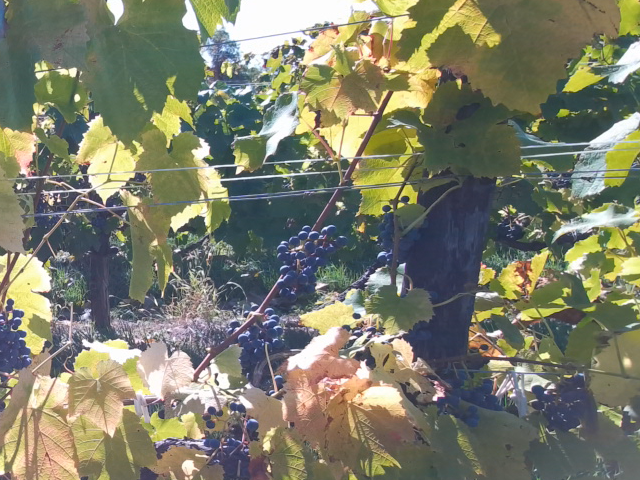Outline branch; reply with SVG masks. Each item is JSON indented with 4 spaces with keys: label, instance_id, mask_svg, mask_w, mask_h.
<instances>
[{
    "label": "branch",
    "instance_id": "ca6c30ca",
    "mask_svg": "<svg viewBox=\"0 0 640 480\" xmlns=\"http://www.w3.org/2000/svg\"><path fill=\"white\" fill-rule=\"evenodd\" d=\"M405 187H406V184L401 183L398 190L396 191L395 197L391 200V208L393 210H397L399 208L398 202Z\"/></svg>",
    "mask_w": 640,
    "mask_h": 480
},
{
    "label": "branch",
    "instance_id": "1ff4a987",
    "mask_svg": "<svg viewBox=\"0 0 640 480\" xmlns=\"http://www.w3.org/2000/svg\"><path fill=\"white\" fill-rule=\"evenodd\" d=\"M19 257H20V252L16 251L15 255H14V258H13V261H12L9 269L7 270V273L5 274L4 278L1 280L0 293L3 292L4 286L6 285L7 281L10 278V276L12 275V272L14 271V269H15L17 263H18Z\"/></svg>",
    "mask_w": 640,
    "mask_h": 480
},
{
    "label": "branch",
    "instance_id": "2b1400db",
    "mask_svg": "<svg viewBox=\"0 0 640 480\" xmlns=\"http://www.w3.org/2000/svg\"><path fill=\"white\" fill-rule=\"evenodd\" d=\"M414 169H415V165H414V164H411V165L409 166V168L407 169V171H406L405 175H404V180H405V181H408V180H409V177H410V175H411V173L413 172V170H414Z\"/></svg>",
    "mask_w": 640,
    "mask_h": 480
},
{
    "label": "branch",
    "instance_id": "ea751061",
    "mask_svg": "<svg viewBox=\"0 0 640 480\" xmlns=\"http://www.w3.org/2000/svg\"><path fill=\"white\" fill-rule=\"evenodd\" d=\"M358 164H359V160H352V162L349 164L346 172L339 180V185L341 187H344L346 185L347 181L352 176L354 169L358 166Z\"/></svg>",
    "mask_w": 640,
    "mask_h": 480
},
{
    "label": "branch",
    "instance_id": "170604dd",
    "mask_svg": "<svg viewBox=\"0 0 640 480\" xmlns=\"http://www.w3.org/2000/svg\"><path fill=\"white\" fill-rule=\"evenodd\" d=\"M395 95V92L393 90H390L384 97L383 99L380 101V108L377 111L374 119L372 120L369 129L367 130L365 136L362 138L361 142L359 143L357 150H356V154L357 155H362L366 146L368 145V142L371 140L373 134L375 133L380 121L382 120L384 113L387 110L388 107V103L389 101L393 98V96Z\"/></svg>",
    "mask_w": 640,
    "mask_h": 480
},
{
    "label": "branch",
    "instance_id": "1af6ec82",
    "mask_svg": "<svg viewBox=\"0 0 640 480\" xmlns=\"http://www.w3.org/2000/svg\"><path fill=\"white\" fill-rule=\"evenodd\" d=\"M53 158H54V154H53V153H50V154L48 155V158H47L46 163H45V165H44V169H43V174H44V175H47V174H48V172H49V168H50V165H51V162H52Z\"/></svg>",
    "mask_w": 640,
    "mask_h": 480
},
{
    "label": "branch",
    "instance_id": "982ccf7c",
    "mask_svg": "<svg viewBox=\"0 0 640 480\" xmlns=\"http://www.w3.org/2000/svg\"><path fill=\"white\" fill-rule=\"evenodd\" d=\"M341 194H342V191L340 189H336L334 191L333 195L330 197L328 203L325 205L324 209L320 213V216L317 218V220L313 225V228L315 230H319L321 228L323 222L326 220L328 214L332 210L333 206L335 205V203L337 202Z\"/></svg>",
    "mask_w": 640,
    "mask_h": 480
},
{
    "label": "branch",
    "instance_id": "325d2c04",
    "mask_svg": "<svg viewBox=\"0 0 640 480\" xmlns=\"http://www.w3.org/2000/svg\"><path fill=\"white\" fill-rule=\"evenodd\" d=\"M277 291L276 287H272L270 292L267 294V296L264 299L263 304L261 305V307H259L255 313L253 314V316L250 317V319L244 323L234 334H232L228 339H226L224 341V343H222L221 345H219L218 347H216L215 349H213L211 351V353L208 355V357L201 363V365H199L194 373H193V379L197 380L198 379V375L199 373L211 362V360L219 353L221 352L223 349H225L230 343H232L236 338L239 337V335L246 330L253 322L257 321V318L259 317V315L267 308L270 300L272 299L273 295L275 294V292Z\"/></svg>",
    "mask_w": 640,
    "mask_h": 480
},
{
    "label": "branch",
    "instance_id": "45aa463d",
    "mask_svg": "<svg viewBox=\"0 0 640 480\" xmlns=\"http://www.w3.org/2000/svg\"><path fill=\"white\" fill-rule=\"evenodd\" d=\"M393 223L395 225V235L391 256L390 282L392 284H395L397 282V273H395V270H397L398 268L399 249L402 238V222L400 221V217L398 215H395L393 217Z\"/></svg>",
    "mask_w": 640,
    "mask_h": 480
},
{
    "label": "branch",
    "instance_id": "30e6481e",
    "mask_svg": "<svg viewBox=\"0 0 640 480\" xmlns=\"http://www.w3.org/2000/svg\"><path fill=\"white\" fill-rule=\"evenodd\" d=\"M466 360H486V361H493V362L534 363V364H539V365H543V366L555 367L556 369H560V370H579V371L592 372V373H597V374H602V375H607V376H613V377H618V378H623V379H628V380L640 381V376L639 375H630V374H625V373H620V372H615V371H609V370H604V369H599V368H594V367H588V366H581V365H562V364H559L557 362L545 361V360H541V359L527 358V357H495V356H488V355H463V356H447L445 358L427 359L426 363L427 364H436V363H448L449 361H466Z\"/></svg>",
    "mask_w": 640,
    "mask_h": 480
},
{
    "label": "branch",
    "instance_id": "1d269e1b",
    "mask_svg": "<svg viewBox=\"0 0 640 480\" xmlns=\"http://www.w3.org/2000/svg\"><path fill=\"white\" fill-rule=\"evenodd\" d=\"M43 183H44V180H38L37 188H36V194H35L34 201H33V207L34 208L38 207Z\"/></svg>",
    "mask_w": 640,
    "mask_h": 480
},
{
    "label": "branch",
    "instance_id": "8bde2521",
    "mask_svg": "<svg viewBox=\"0 0 640 480\" xmlns=\"http://www.w3.org/2000/svg\"><path fill=\"white\" fill-rule=\"evenodd\" d=\"M66 124H67V121H66V120H63V121L61 122V125H60V127H59V129H58V133H57V136H58V137H61V136L63 135V132H64L65 127H66Z\"/></svg>",
    "mask_w": 640,
    "mask_h": 480
}]
</instances>
